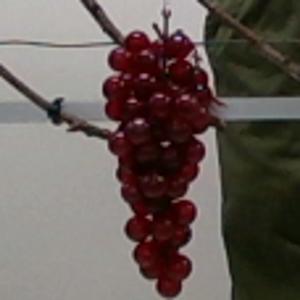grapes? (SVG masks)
<instances>
[{
	"mask_svg": "<svg viewBox=\"0 0 300 300\" xmlns=\"http://www.w3.org/2000/svg\"><path fill=\"white\" fill-rule=\"evenodd\" d=\"M190 37L175 34L151 40L135 30L108 57L112 75L102 92L108 120L119 123L108 140L118 158L115 178L135 214L124 233L136 243L132 257L143 278L156 281L160 296L173 299L183 289L193 263L180 248L189 244L198 209L183 199L200 174L206 147L195 136L210 126L207 108L214 93L205 69L188 58Z\"/></svg>",
	"mask_w": 300,
	"mask_h": 300,
	"instance_id": "obj_1",
	"label": "grapes"
}]
</instances>
